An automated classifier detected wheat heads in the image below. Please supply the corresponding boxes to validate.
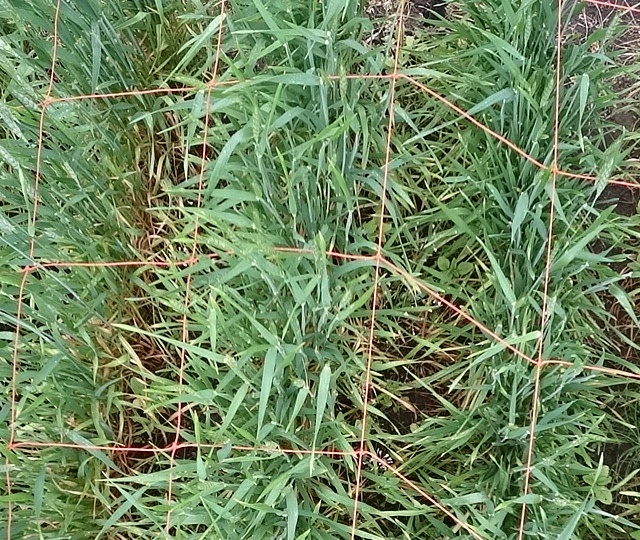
[252,107,262,141]
[0,0,18,18]
[64,162,78,182]
[252,182,262,198]
[24,177,43,204]
[291,375,307,389]
[0,113,27,141]
[535,119,549,142]
[181,385,203,400]
[200,236,230,255]
[605,11,618,42]
[190,120,214,138]
[301,171,310,191]
[168,297,188,316]
[173,73,206,94]
[0,36,20,57]
[338,64,349,98]
[553,497,569,510]
[523,15,534,43]
[597,156,615,192]
[255,239,279,257]
[13,90,41,111]
[281,484,293,501]
[326,154,337,172]
[543,240,560,266]
[311,239,322,258]
[0,463,14,473]
[223,226,243,247]
[213,120,228,141]
[226,362,248,383]
[541,78,554,105]
[15,73,36,97]
[196,479,218,490]
[546,294,558,313]
[265,441,280,451]
[586,431,614,445]
[565,435,585,451]
[0,144,19,166]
